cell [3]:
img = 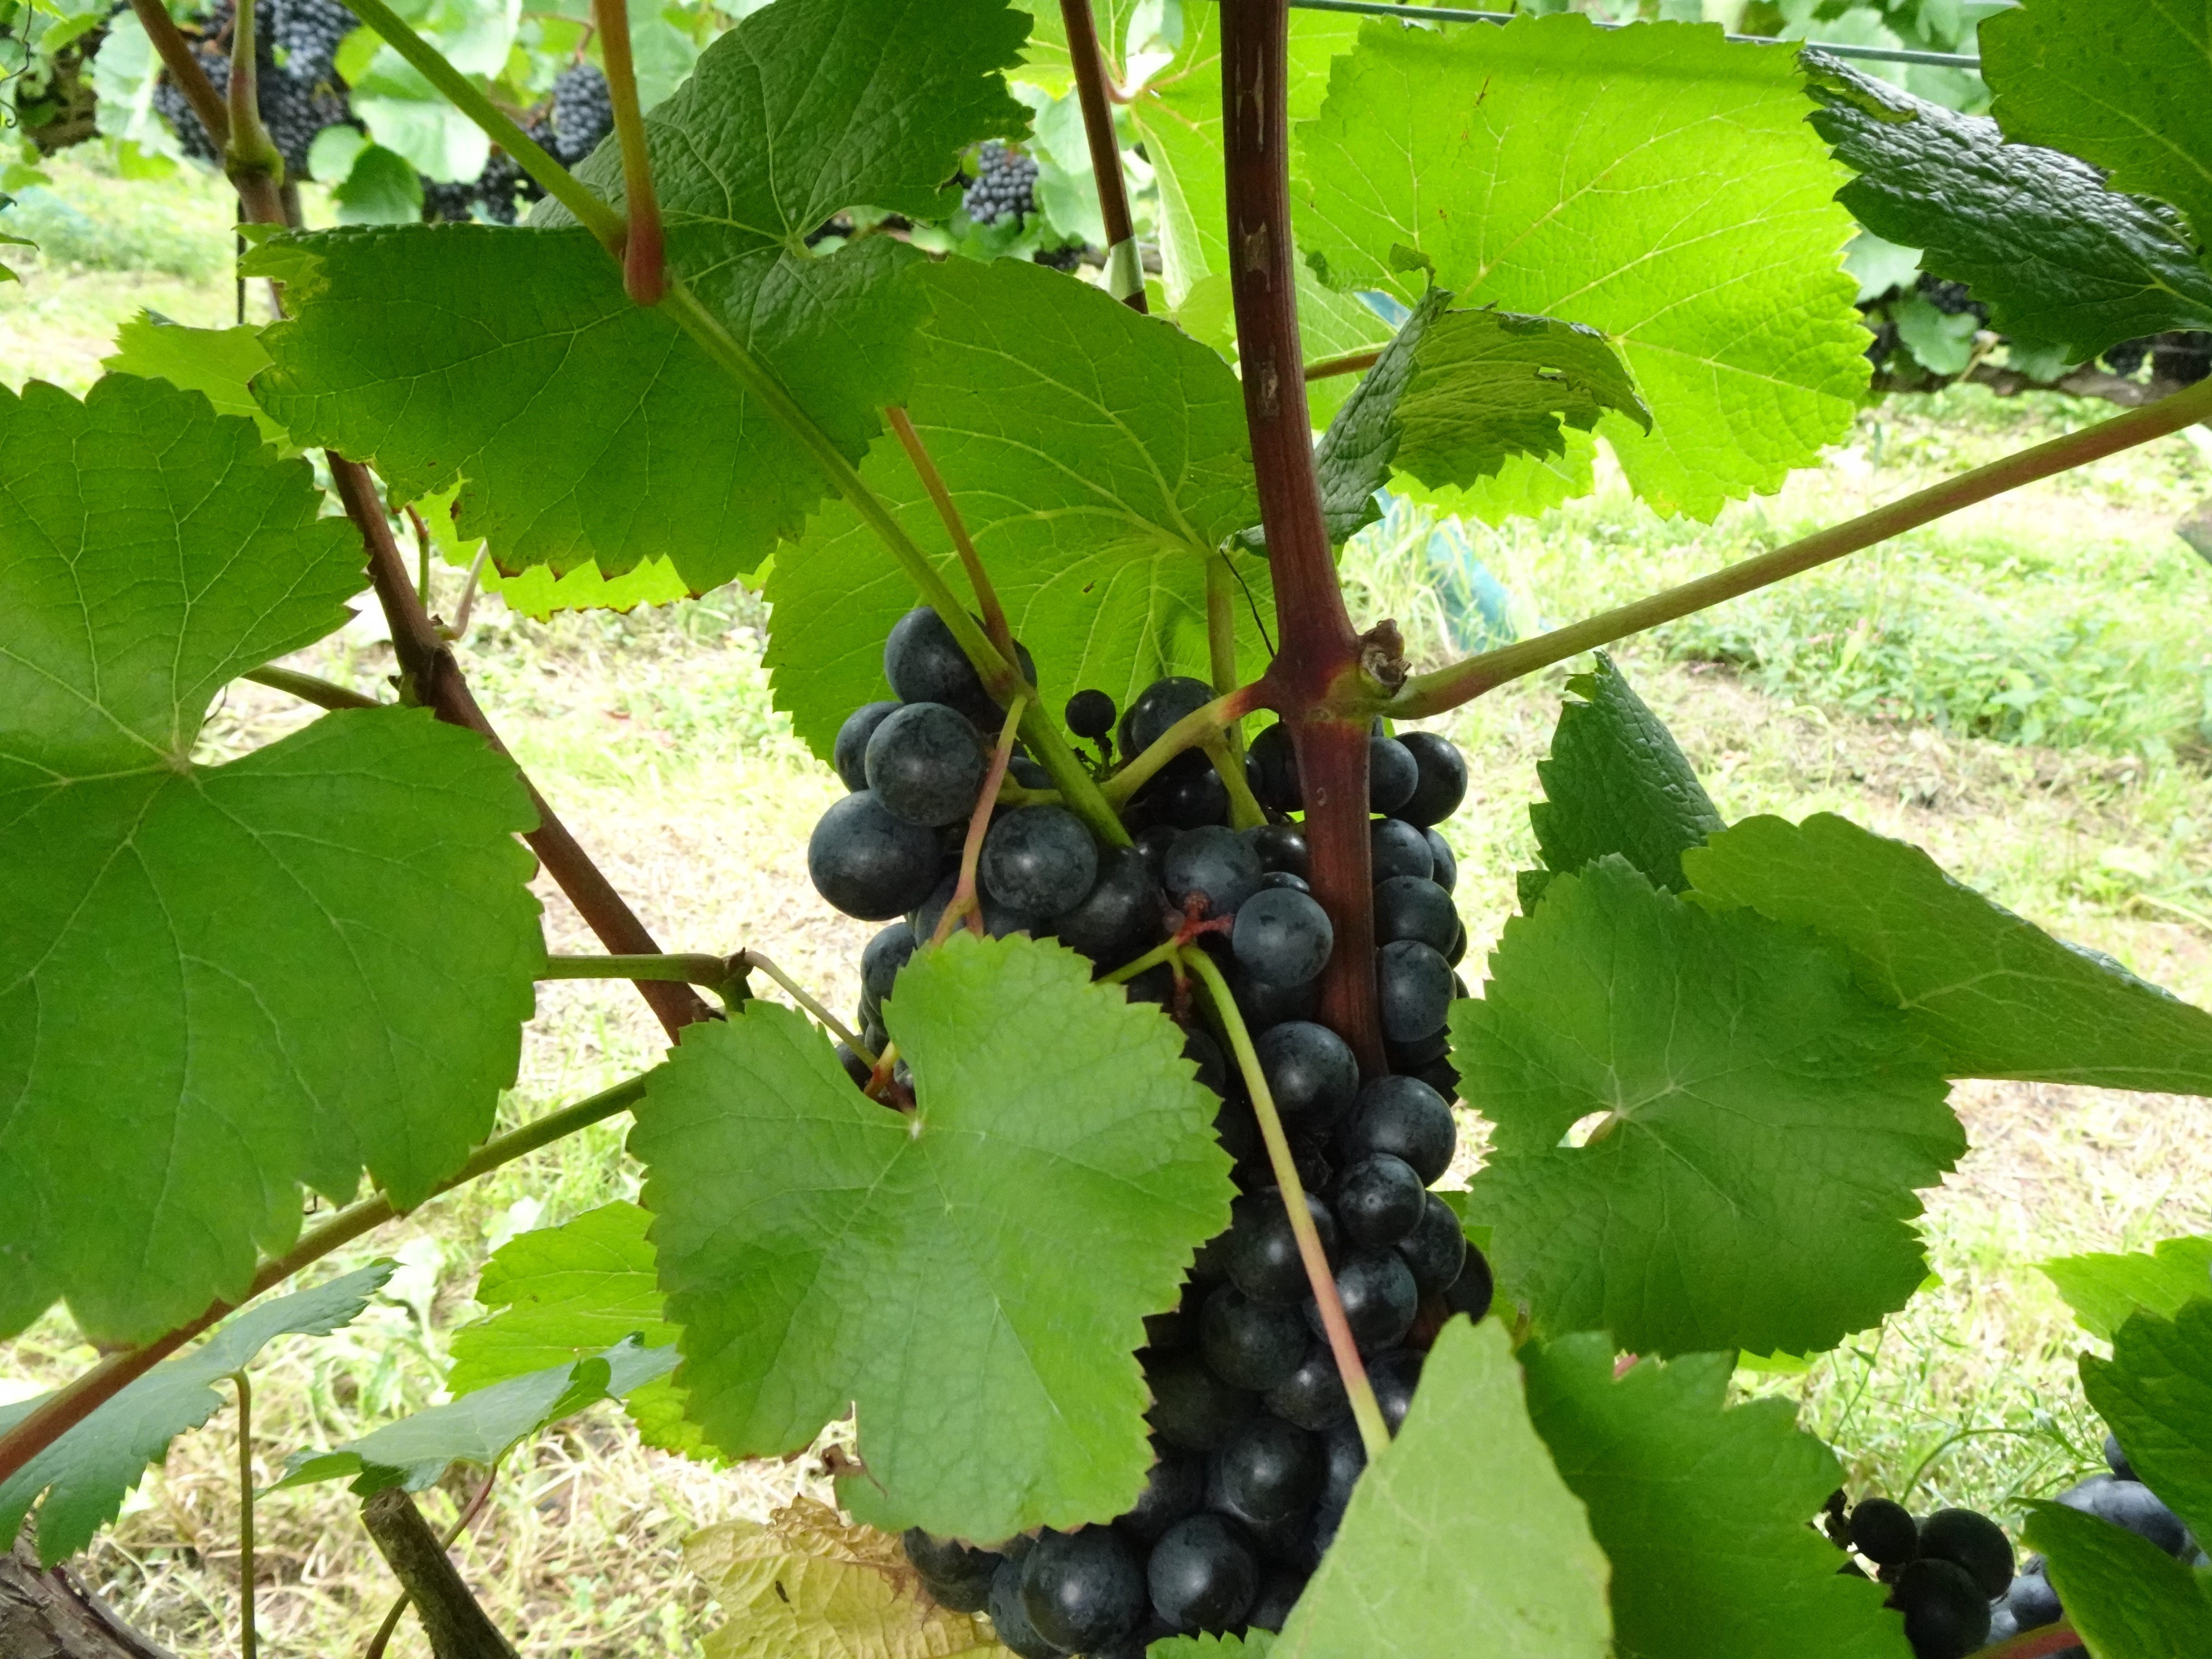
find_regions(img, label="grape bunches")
[1824,1488,2013,1659]
[1980,1432,2212,1659]
[810,606,1493,1659]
